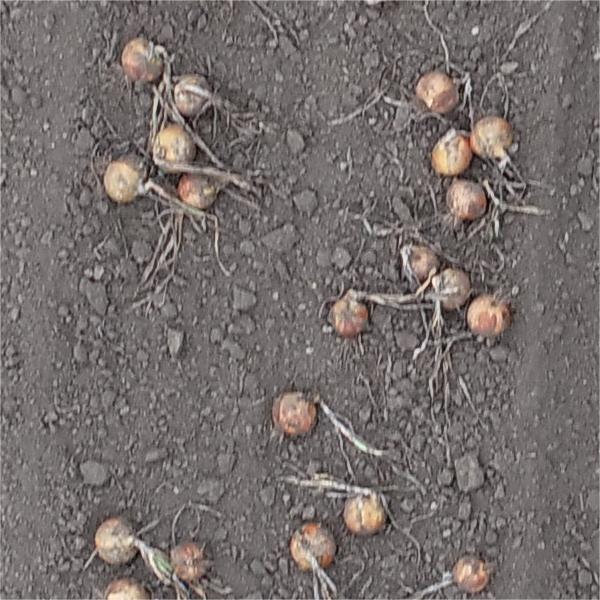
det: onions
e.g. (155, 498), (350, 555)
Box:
(415, 71), (456, 113)
(401, 244), (440, 284)
(342, 492), (386, 534)
(102, 158), (142, 201)
(288, 524), (335, 568)
(171, 541), (209, 579)
(444, 181), (484, 219)
(433, 268), (468, 301)
(471, 116), (514, 159)
(450, 554), (488, 590)
(95, 514), (135, 562)
(105, 575), (150, 599)
(119, 38), (165, 83)
(172, 76), (210, 115)
(466, 293), (510, 336)
(274, 391), (314, 437)
(176, 172), (215, 209)
(152, 123), (191, 162)
(430, 133), (469, 173)
(326, 293), (365, 334)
